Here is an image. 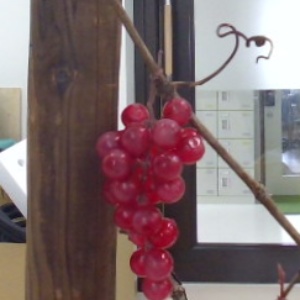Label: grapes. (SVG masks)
<instances>
[{
  "label": "grapes",
  "instance_id": "obj_1",
  "mask_svg": "<svg viewBox=\"0 0 300 300\" xmlns=\"http://www.w3.org/2000/svg\"><path fill=\"white\" fill-rule=\"evenodd\" d=\"M147 106L128 104L121 112V131H106L95 143L106 176L103 193L115 205L113 222L140 247L132 254L134 274L145 277L146 300H190L173 271V256L165 250L178 238L176 219L164 217L157 204L180 203L185 194L182 170L205 155L203 136L193 127V108L184 97H173L162 107L154 127Z\"/></svg>",
  "mask_w": 300,
  "mask_h": 300
}]
</instances>
